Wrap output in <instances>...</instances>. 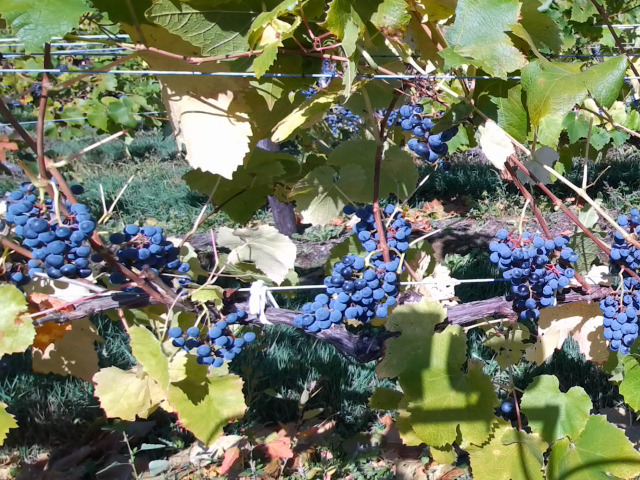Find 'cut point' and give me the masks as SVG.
Here are the masks:
<instances>
[{
    "instance_id": "obj_2",
    "label": "cut point",
    "mask_w": 640,
    "mask_h": 480,
    "mask_svg": "<svg viewBox=\"0 0 640 480\" xmlns=\"http://www.w3.org/2000/svg\"><path fill=\"white\" fill-rule=\"evenodd\" d=\"M530 202L528 200V198L525 199V203L522 205L519 214H518V222H517V227L521 228L523 225V217H524V213L526 212L527 208L529 207Z\"/></svg>"
},
{
    "instance_id": "obj_1",
    "label": "cut point",
    "mask_w": 640,
    "mask_h": 480,
    "mask_svg": "<svg viewBox=\"0 0 640 480\" xmlns=\"http://www.w3.org/2000/svg\"><path fill=\"white\" fill-rule=\"evenodd\" d=\"M45 180L48 183V185H50L53 188V191L55 193L54 209L58 210V205L60 203V195H59L58 186L54 181H52L50 179H45Z\"/></svg>"
}]
</instances>
